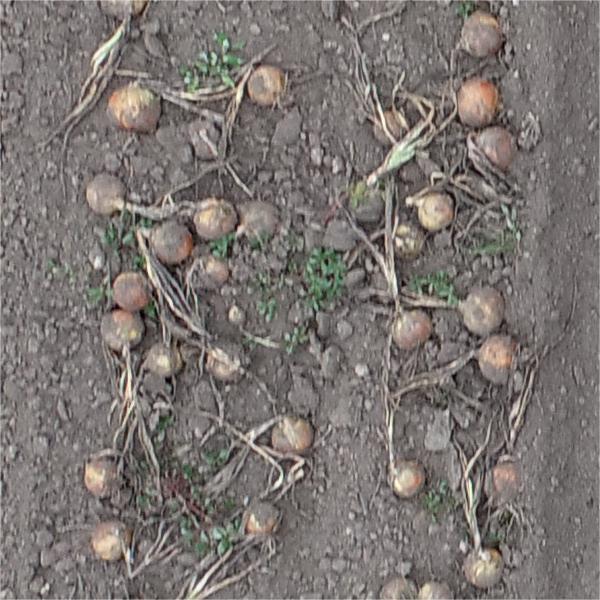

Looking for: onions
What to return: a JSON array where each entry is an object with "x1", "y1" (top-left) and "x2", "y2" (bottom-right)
[
  {"x1": 456, "y1": 78, "x2": 499, "y2": 124},
  {"x1": 246, "y1": 66, "x2": 285, "y2": 104},
  {"x1": 477, "y1": 336, "x2": 518, "y2": 379},
  {"x1": 83, "y1": 174, "x2": 125, "y2": 214},
  {"x1": 379, "y1": 574, "x2": 413, "y2": 599},
  {"x1": 224, "y1": 302, "x2": 244, "y2": 324},
  {"x1": 101, "y1": 310, "x2": 144, "y2": 348},
  {"x1": 194, "y1": 199, "x2": 234, "y2": 241},
  {"x1": 373, "y1": 106, "x2": 407, "y2": 144},
  {"x1": 238, "y1": 198, "x2": 276, "y2": 244},
  {"x1": 469, "y1": 125, "x2": 514, "y2": 169},
  {"x1": 151, "y1": 222, "x2": 192, "y2": 262},
  {"x1": 189, "y1": 123, "x2": 217, "y2": 156},
  {"x1": 392, "y1": 220, "x2": 425, "y2": 254},
  {"x1": 273, "y1": 417, "x2": 311, "y2": 452},
  {"x1": 463, "y1": 545, "x2": 502, "y2": 584},
  {"x1": 459, "y1": 287, "x2": 503, "y2": 332},
  {"x1": 206, "y1": 346, "x2": 239, "y2": 380},
  {"x1": 458, "y1": 11, "x2": 503, "y2": 54},
  {"x1": 88, "y1": 521, "x2": 125, "y2": 559},
  {"x1": 188, "y1": 254, "x2": 228, "y2": 287},
  {"x1": 485, "y1": 459, "x2": 522, "y2": 499},
  {"x1": 107, "y1": 83, "x2": 157, "y2": 131},
  {"x1": 350, "y1": 184, "x2": 384, "y2": 224},
  {"x1": 146, "y1": 344, "x2": 180, "y2": 377},
  {"x1": 388, "y1": 460, "x2": 424, "y2": 496},
  {"x1": 82, "y1": 452, "x2": 119, "y2": 496},
  {"x1": 415, "y1": 193, "x2": 452, "y2": 231},
  {"x1": 111, "y1": 271, "x2": 150, "y2": 310},
  {"x1": 104, "y1": 0, "x2": 144, "y2": 16},
  {"x1": 242, "y1": 499, "x2": 280, "y2": 536},
  {"x1": 414, "y1": 579, "x2": 450, "y2": 599},
  {"x1": 392, "y1": 310, "x2": 430, "y2": 347}
]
